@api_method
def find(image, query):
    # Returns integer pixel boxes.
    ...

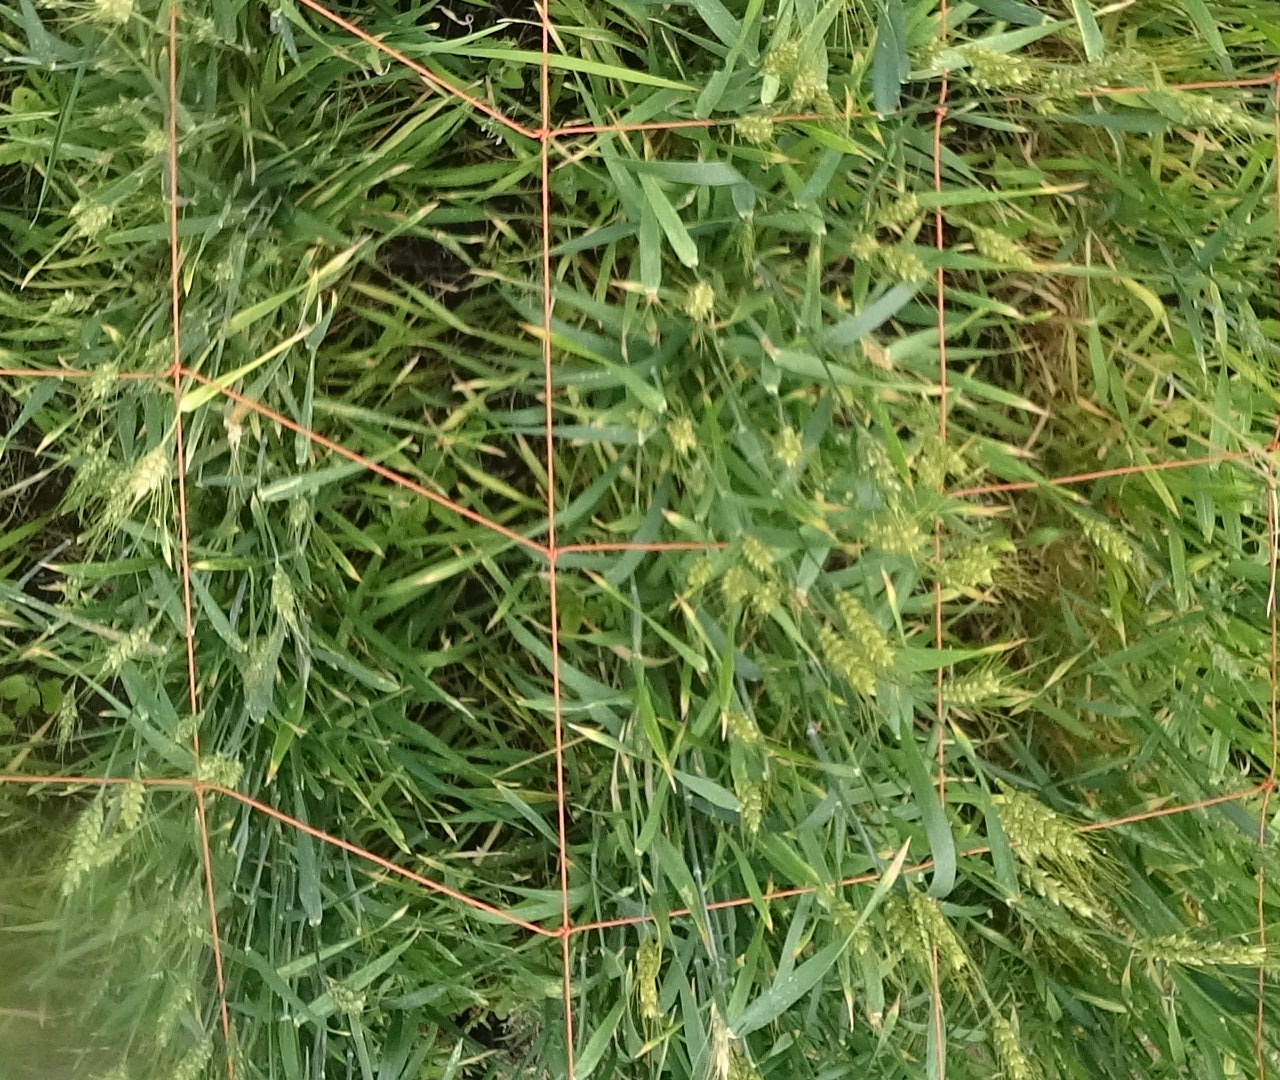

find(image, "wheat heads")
[1047,57,1154,98]
[686,279,721,323]
[882,899,926,963]
[667,423,698,455]
[765,42,793,75]
[228,760,244,786]
[229,1019,244,1076]
[820,626,880,700]
[61,689,78,741]
[689,556,715,582]
[1162,82,1245,125]
[108,885,140,942]
[919,883,970,969]
[1076,515,1137,559]
[127,450,161,500]
[736,119,774,145]
[108,630,147,666]
[141,126,170,152]
[931,427,965,474]
[866,518,918,548]
[733,769,760,833]
[734,221,756,256]
[856,430,898,502]
[811,883,864,946]
[708,1013,737,1072]
[1009,784,1084,857]
[726,701,757,740]
[217,262,237,285]
[918,457,941,502]
[1207,637,1243,685]
[1129,939,1271,963]
[79,440,105,482]
[750,574,780,609]
[97,835,128,863]
[159,970,200,1041]
[725,562,741,600]
[151,887,175,941]
[48,291,95,315]
[998,1018,1028,1079]
[789,76,824,109]
[64,802,101,885]
[935,671,1000,706]
[87,0,132,23]
[877,196,925,223]
[741,534,779,571]
[193,753,217,788]
[78,972,110,1022]
[1027,870,1105,924]
[89,360,118,395]
[291,497,310,527]
[835,589,893,666]
[322,974,367,1016]
[779,425,804,466]
[850,233,881,261]
[77,203,115,238]
[884,246,933,282]
[111,462,129,494]
[119,773,148,828]
[182,873,202,912]
[758,646,785,704]
[996,800,1044,871]
[270,565,296,625]
[972,225,1039,265]
[941,557,994,591]
[166,1041,213,1079]
[637,939,657,1018]
[960,45,1024,85]
[178,705,205,746]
